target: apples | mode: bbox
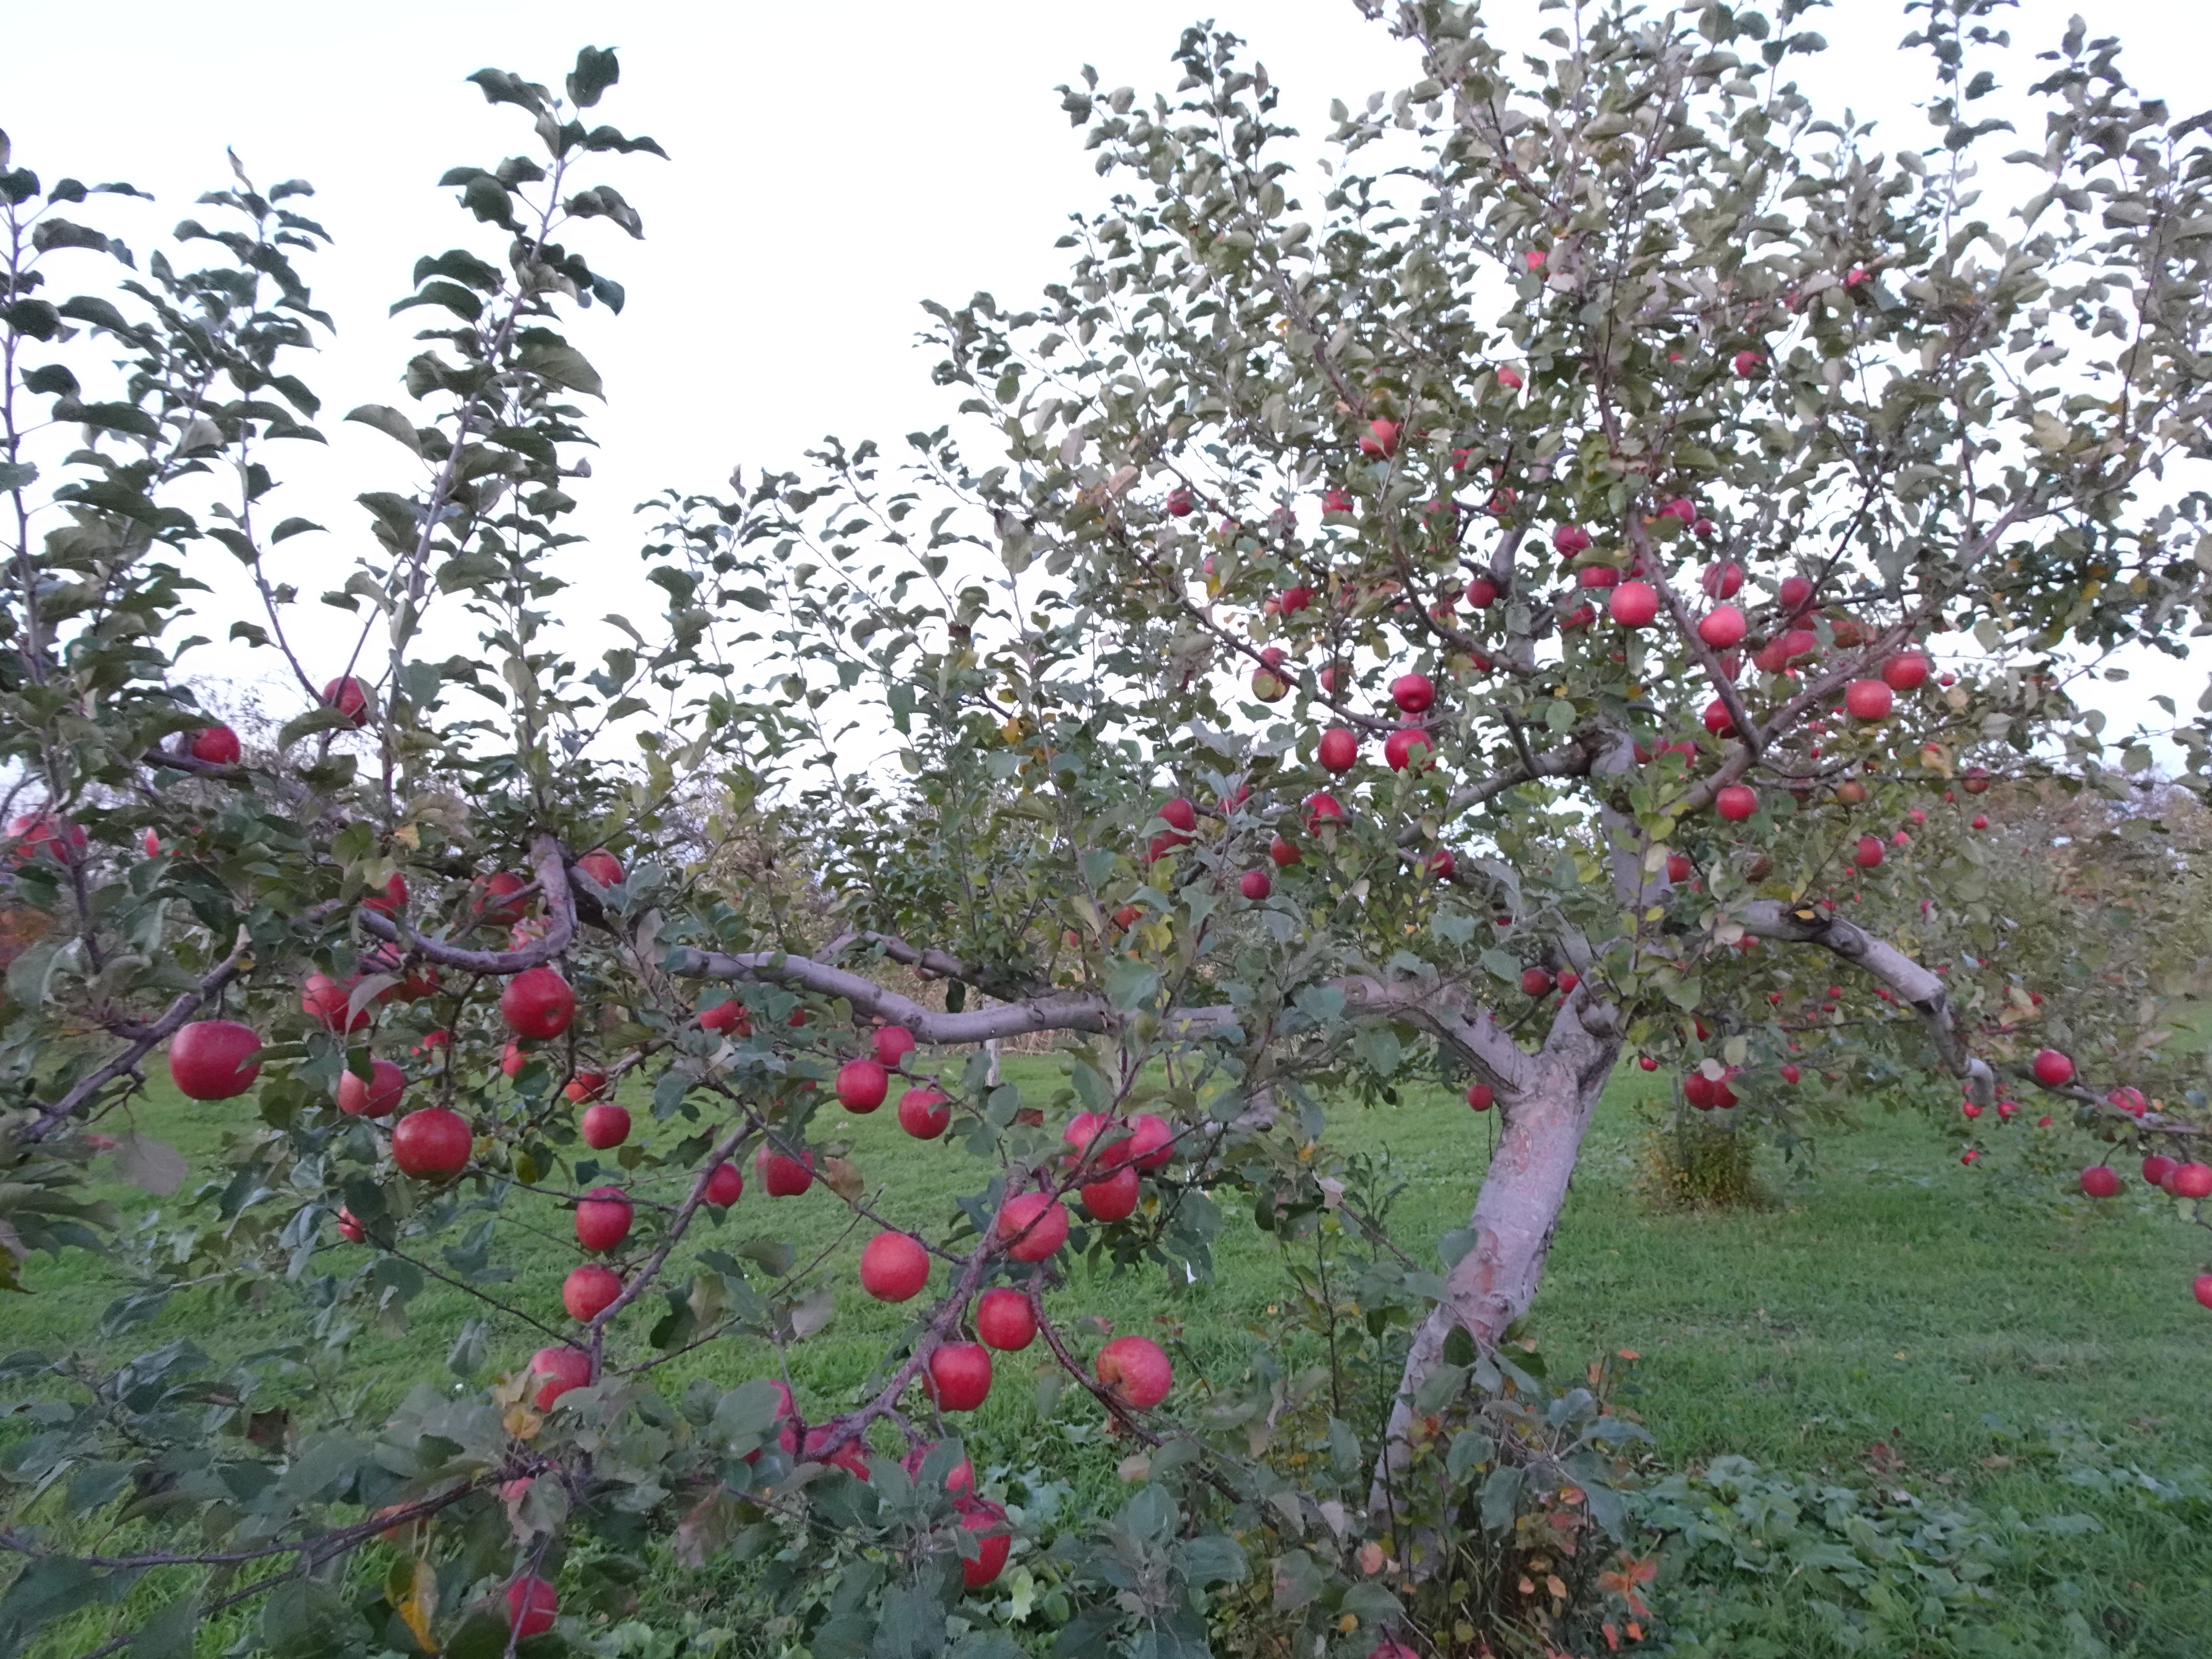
[1270,835,1303,867]
[1666,855,1690,883]
[1836,782,1865,806]
[1621,555,1645,583]
[836,1060,888,1114]
[787,1008,805,1027]
[363,872,410,922]
[1941,672,1956,686]
[2107,1086,2144,1118]
[1395,604,1412,613]
[1281,586,1317,616]
[1783,630,1817,665]
[1723,1063,1742,1076]
[700,1000,740,1036]
[1126,1114,1174,1169]
[1784,292,1807,314]
[302,974,371,1034]
[1714,1075,1739,1109]
[959,1499,1011,1588]
[1359,419,1397,460]
[1218,786,1249,813]
[1633,736,1661,764]
[1556,995,1566,1006]
[1338,585,1356,609]
[1489,487,1517,513]
[338,1205,367,1244]
[578,848,624,889]
[1492,460,1516,480]
[1204,554,1215,574]
[1389,421,1403,434]
[1416,429,1428,436]
[1468,1083,1493,1111]
[169,1020,262,1100]
[2142,1155,2178,1185]
[1240,870,1270,900]
[1454,673,1458,681]
[1784,668,1797,680]
[392,1108,473,1181]
[1720,655,1741,682]
[508,919,552,951]
[582,1105,631,1149]
[1659,507,1677,518]
[701,1162,743,1208]
[1924,742,1939,753]
[1678,1018,1710,1041]
[565,1072,606,1104]
[412,1029,449,1063]
[1668,352,1683,362]
[977,1287,1038,1351]
[500,967,575,1041]
[1962,766,1989,794]
[1470,654,1490,673]
[1612,651,1625,662]
[1824,652,1848,667]
[736,1005,752,1039]
[323,676,368,728]
[1662,737,1694,769]
[2081,1166,2118,1198]
[1684,1073,1715,1103]
[1864,627,1877,648]
[1556,969,1580,994]
[860,1231,929,1302]
[1424,850,1454,877]
[1080,1166,1139,1222]
[1428,601,1455,620]
[1220,520,1232,537]
[1384,579,1401,592]
[575,1186,634,1251]
[1318,728,1358,773]
[2034,1049,2072,1085]
[377,942,441,996]
[1698,605,1746,649]
[1788,778,1816,803]
[1466,579,1498,608]
[1746,311,1763,333]
[1752,636,1789,674]
[1487,1014,1496,1021]
[503,1476,535,1500]
[2161,1170,2179,1196]
[1063,1111,1131,1184]
[1735,350,1766,377]
[1609,581,1658,629]
[1689,1097,1717,1112]
[998,1193,1069,1262]
[1321,667,1345,693]
[2173,1163,2212,1198]
[1703,561,1742,599]
[1113,905,1143,930]
[1400,711,1424,722]
[1429,547,1439,552]
[1522,969,1550,997]
[1694,519,1712,537]
[190,726,240,764]
[1423,499,1459,530]
[1882,651,1927,691]
[1561,599,1595,631]
[1272,508,1296,539]
[922,1341,992,1412]
[1251,667,1290,703]
[1555,525,1590,559]
[1096,1336,1171,1411]
[820,1421,882,1481]
[1780,576,1815,614]
[1167,488,1195,517]
[1443,591,1463,603]
[1496,915,1513,925]
[899,1442,974,1515]
[1525,251,1551,283]
[1162,819,1197,847]
[1705,698,1744,739]
[756,1144,772,1174]
[1717,784,1757,821]
[472,873,528,925]
[1830,619,1865,649]
[1384,729,1435,780]
[1392,673,1433,714]
[529,1345,593,1414]
[1753,299,1759,306]
[1301,793,1343,838]
[1260,647,1282,668]
[1791,609,1823,631]
[506,1576,557,1639]
[1158,798,1194,831]
[1445,535,1457,545]
[2193,1274,2212,1310]
[6,812,86,869]
[1670,499,1696,524]
[0,187,7,208]
[1846,679,1891,721]
[767,1150,813,1196]
[503,1035,533,1079]
[1844,270,1872,289]
[1143,838,1168,862]
[1322,488,1353,514]
[1497,367,1522,391]
[1068,932,1077,948]
[338,1060,404,1119]
[774,1081,816,1105]
[870,1026,915,1074]
[1263,596,1282,617]
[1852,836,1884,867]
[1690,877,1703,894]
[1452,447,1475,474]
[1369,1643,1418,1659]
[562,1263,622,1323]
[742,1380,832,1467]
[1580,566,1619,588]
[145,826,201,857]
[357,956,394,1005]
[899,1087,950,1139]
